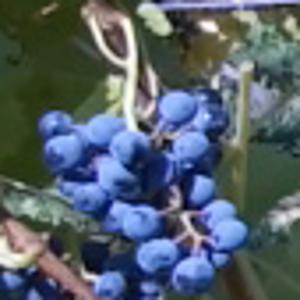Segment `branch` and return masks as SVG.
Masks as SVG:
<instances>
[{"mask_svg":"<svg viewBox=\"0 0 300 300\" xmlns=\"http://www.w3.org/2000/svg\"><path fill=\"white\" fill-rule=\"evenodd\" d=\"M87 5L92 7V15L101 27L113 53L123 58L126 56V45L120 19H129L136 35L137 53V87L146 97L151 96L149 78L146 71L145 49L140 37L139 27L129 9L122 0H88Z\"/></svg>","mask_w":300,"mask_h":300,"instance_id":"obj_2","label":"branch"},{"mask_svg":"<svg viewBox=\"0 0 300 300\" xmlns=\"http://www.w3.org/2000/svg\"><path fill=\"white\" fill-rule=\"evenodd\" d=\"M0 235L7 240L10 252L27 253L32 249L37 253L34 258L36 267L42 268L47 276L60 280L63 286L78 298L90 297V288L79 282L64 265L55 261L50 246L15 218L4 205H0Z\"/></svg>","mask_w":300,"mask_h":300,"instance_id":"obj_1","label":"branch"}]
</instances>
